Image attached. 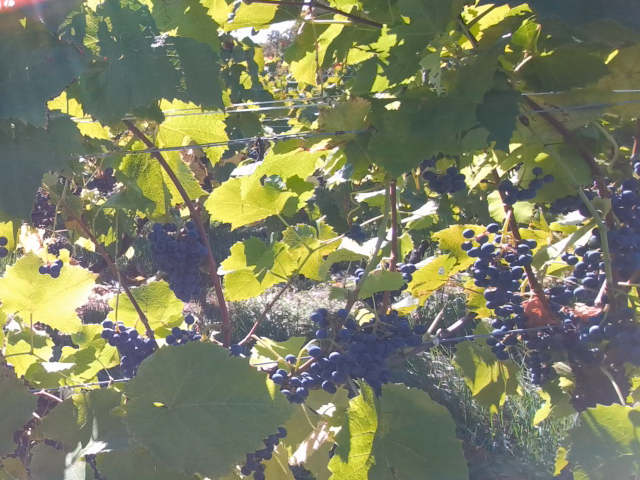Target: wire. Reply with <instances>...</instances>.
Returning a JSON list of instances; mask_svg holds the SVG:
<instances>
[{
  "label": "wire",
  "mask_w": 640,
  "mask_h": 480,
  "mask_svg": "<svg viewBox=\"0 0 640 480\" xmlns=\"http://www.w3.org/2000/svg\"><path fill=\"white\" fill-rule=\"evenodd\" d=\"M356 133H357L356 129H349L344 131L343 130L332 131L328 133L306 132V133H292L288 135H260V136H253L249 138H238V139H231V140H224V141H209L205 143H198V144H192V145L181 146V147L150 148V149H142V150L133 149L132 151H122V152H115V153L82 154V155L70 156L68 158V161L72 162V161L84 160V159L117 158V157L144 155V154H152V153L183 152V151H189V150L200 149V148H210L211 146H226V145H234V144H240V143H251V142L263 141V140H291L294 138H308V137L330 138L335 136H341L343 134L352 135Z\"/></svg>",
  "instance_id": "wire-1"
},
{
  "label": "wire",
  "mask_w": 640,
  "mask_h": 480,
  "mask_svg": "<svg viewBox=\"0 0 640 480\" xmlns=\"http://www.w3.org/2000/svg\"><path fill=\"white\" fill-rule=\"evenodd\" d=\"M562 327H563L562 323H556V324H552V325H549V326L534 327V328H504V329H499V330H491V331H483V332L471 333V334L458 336V337H454V338H444V339L440 340V343L441 344L456 343V342L465 341V340H469V339H473V338L501 335V334H507V333L545 332V331H551V330H554V329H559V328H562Z\"/></svg>",
  "instance_id": "wire-2"
},
{
  "label": "wire",
  "mask_w": 640,
  "mask_h": 480,
  "mask_svg": "<svg viewBox=\"0 0 640 480\" xmlns=\"http://www.w3.org/2000/svg\"><path fill=\"white\" fill-rule=\"evenodd\" d=\"M127 381H128L127 377L110 378V379H103V380H92L91 382H88V383H82V384L73 385V386H52V387H45V388H30L29 392L30 393H47V392H54V391H75V390L90 388V387H93L94 385L122 383Z\"/></svg>",
  "instance_id": "wire-3"
},
{
  "label": "wire",
  "mask_w": 640,
  "mask_h": 480,
  "mask_svg": "<svg viewBox=\"0 0 640 480\" xmlns=\"http://www.w3.org/2000/svg\"><path fill=\"white\" fill-rule=\"evenodd\" d=\"M635 103H639V100L624 101V102L613 104V105H596L591 107H567V108L548 109V110H541V111L521 112L520 116L532 115V114H543V113H550V112H561V111H569V110H594L599 108H615V107H620L626 104H635Z\"/></svg>",
  "instance_id": "wire-4"
},
{
  "label": "wire",
  "mask_w": 640,
  "mask_h": 480,
  "mask_svg": "<svg viewBox=\"0 0 640 480\" xmlns=\"http://www.w3.org/2000/svg\"><path fill=\"white\" fill-rule=\"evenodd\" d=\"M335 98H336V95L290 98V99H275V100H267V102L233 103V106L276 105V104H280V102H292V101H304V100H316V99H335Z\"/></svg>",
  "instance_id": "wire-5"
},
{
  "label": "wire",
  "mask_w": 640,
  "mask_h": 480,
  "mask_svg": "<svg viewBox=\"0 0 640 480\" xmlns=\"http://www.w3.org/2000/svg\"><path fill=\"white\" fill-rule=\"evenodd\" d=\"M316 107H320V104L276 106V107H267V108H258V109H244V110H227L226 114H229V113L260 112V111H270V110H278V109H308V108H316Z\"/></svg>",
  "instance_id": "wire-6"
}]
</instances>
